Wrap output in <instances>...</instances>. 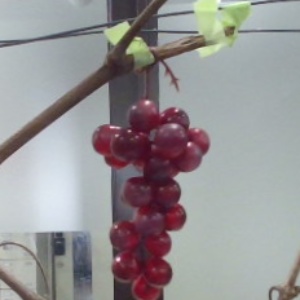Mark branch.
I'll use <instances>...</instances> for the list:
<instances>
[{
	"label": "branch",
	"mask_w": 300,
	"mask_h": 300,
	"mask_svg": "<svg viewBox=\"0 0 300 300\" xmlns=\"http://www.w3.org/2000/svg\"><path fill=\"white\" fill-rule=\"evenodd\" d=\"M202 46H204V37L203 35H200L196 37L183 38L163 47L148 46V49L154 56V62L159 63L161 60L172 57L175 54L197 50Z\"/></svg>",
	"instance_id": "325d2c04"
},
{
	"label": "branch",
	"mask_w": 300,
	"mask_h": 300,
	"mask_svg": "<svg viewBox=\"0 0 300 300\" xmlns=\"http://www.w3.org/2000/svg\"><path fill=\"white\" fill-rule=\"evenodd\" d=\"M168 0H153L148 7L134 19L125 35L107 55L108 64L103 65L96 73L81 82H77L74 88L68 90L47 106L42 113L32 118L23 125L19 131L12 134L0 143V164L7 161L15 152L20 150L33 137L44 131L52 123L74 109L78 104L91 96L96 90L110 82L112 79L134 67L135 57L133 53L126 54V49L138 32L140 27L162 8Z\"/></svg>",
	"instance_id": "30e6481e"
}]
</instances>
